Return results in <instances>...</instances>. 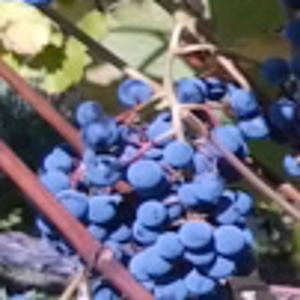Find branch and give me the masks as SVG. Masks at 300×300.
<instances>
[{"mask_svg":"<svg viewBox=\"0 0 300 300\" xmlns=\"http://www.w3.org/2000/svg\"><path fill=\"white\" fill-rule=\"evenodd\" d=\"M42 13L57 26L69 30L79 40L89 44L90 46H94L97 51L104 55L108 60L118 65L120 68L124 69L127 72L133 73L142 81L147 82L156 93L162 92V83L154 75L148 73L137 64L131 63L127 59H124L122 56L118 55L109 46H106L100 38L94 37L90 33H87L84 29L79 27L75 22L67 20L66 18L57 14L51 9L49 5H44L42 7Z\"/></svg>","mask_w":300,"mask_h":300,"instance_id":"982ccf7c","label":"branch"},{"mask_svg":"<svg viewBox=\"0 0 300 300\" xmlns=\"http://www.w3.org/2000/svg\"><path fill=\"white\" fill-rule=\"evenodd\" d=\"M0 74L5 82L14 85L21 96L35 107L49 127H54L60 131L77 157L84 155V148L79 141L78 129L65 121L58 110L49 104L14 66L0 59Z\"/></svg>","mask_w":300,"mask_h":300,"instance_id":"325d2c04","label":"branch"},{"mask_svg":"<svg viewBox=\"0 0 300 300\" xmlns=\"http://www.w3.org/2000/svg\"><path fill=\"white\" fill-rule=\"evenodd\" d=\"M166 12L170 13L177 20L185 23L191 33L204 47L234 76L240 86H246L251 90V84L243 74L242 70L220 49L215 43L197 14L180 2L171 3L169 0H156Z\"/></svg>","mask_w":300,"mask_h":300,"instance_id":"45aa463d","label":"branch"},{"mask_svg":"<svg viewBox=\"0 0 300 300\" xmlns=\"http://www.w3.org/2000/svg\"><path fill=\"white\" fill-rule=\"evenodd\" d=\"M0 170L19 187L39 213L66 239L73 253L99 271L127 300H155L149 288L128 272L115 255L94 241L63 208L26 163L0 140Z\"/></svg>","mask_w":300,"mask_h":300,"instance_id":"30e6481e","label":"branch"},{"mask_svg":"<svg viewBox=\"0 0 300 300\" xmlns=\"http://www.w3.org/2000/svg\"><path fill=\"white\" fill-rule=\"evenodd\" d=\"M183 118L189 124L194 135L204 138L207 141L210 150L233 166L243 179H245L255 188H258L266 196L273 199L287 212L294 214L297 218H300V206L293 204L280 192L270 187L268 183L262 179H259L255 174L248 170L245 164L239 158H237L233 153H230L225 147L220 145L212 135L207 134L201 128L197 120L192 117L191 112L185 111L183 113Z\"/></svg>","mask_w":300,"mask_h":300,"instance_id":"170604dd","label":"branch"}]
</instances>
